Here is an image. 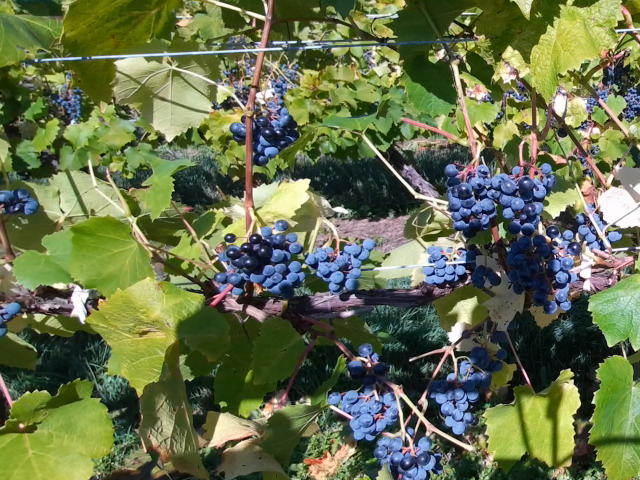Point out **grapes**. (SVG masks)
<instances>
[{
	"label": "grapes",
	"instance_id": "1",
	"mask_svg": "<svg viewBox=\"0 0 640 480\" xmlns=\"http://www.w3.org/2000/svg\"><path fill=\"white\" fill-rule=\"evenodd\" d=\"M543 174L542 183L538 179L521 175L514 180L506 173L495 175L492 179L489 175V165L477 166L476 174L468 173L467 182H461L456 175L458 167L447 164L444 173L447 175L445 186L448 188V212L454 220L453 229L462 231L465 238H473L476 232L486 231L489 222L497 215L494 200L504 206L503 217L512 220L507 232L512 236L519 234L509 247L506 254V264L511 269L509 278L512 281L511 290L514 294H521L526 286H533L534 303L543 306L546 315H554L559 311H569L572 302L569 300L568 291L570 283L578 280L575 272H568L575 267V262L570 257H558L547 264L550 272L557 273L555 281L558 289L555 291V300L548 301L550 284L541 275L540 265L536 261L528 259L524 252L536 247L535 257L539 260H547L558 254L557 249H552L547 243V237L556 239L555 247H562L565 255L578 256L581 253V244L573 238L571 230H565L559 234L557 226H549L544 234H536L533 237L536 225L541 221L540 215L545 209L542 200L546 197V188H554L558 179L551 175L552 166L548 163L540 165Z\"/></svg>",
	"mask_w": 640,
	"mask_h": 480
},
{
	"label": "grapes",
	"instance_id": "2",
	"mask_svg": "<svg viewBox=\"0 0 640 480\" xmlns=\"http://www.w3.org/2000/svg\"><path fill=\"white\" fill-rule=\"evenodd\" d=\"M270 226L261 228V235L252 233L249 242L240 245H229L224 252L218 254V260L227 265V272H216V283H227L233 296L244 293L245 281H252L265 288L271 295H282L291 298L294 287L306 280V272L301 270L299 260H291L292 255H300L304 247L298 242L296 233L272 235Z\"/></svg>",
	"mask_w": 640,
	"mask_h": 480
},
{
	"label": "grapes",
	"instance_id": "3",
	"mask_svg": "<svg viewBox=\"0 0 640 480\" xmlns=\"http://www.w3.org/2000/svg\"><path fill=\"white\" fill-rule=\"evenodd\" d=\"M364 391L357 393L349 390L344 395L340 392H332L327 396V401L332 405H339L346 413H351L352 419L348 421L352 430V438L355 442L363 438L371 442L382 434L386 426H391L398 419L396 399L394 391H385L383 395H372L368 401L359 399L366 397L373 390L376 377L371 374L363 378Z\"/></svg>",
	"mask_w": 640,
	"mask_h": 480
},
{
	"label": "grapes",
	"instance_id": "4",
	"mask_svg": "<svg viewBox=\"0 0 640 480\" xmlns=\"http://www.w3.org/2000/svg\"><path fill=\"white\" fill-rule=\"evenodd\" d=\"M469 360L461 361L458 366V373L464 376L460 381V387L453 386L457 375L449 373L445 380H435L428 391L429 397L437 404H441L440 411L445 415V425L450 427L455 435H461L466 426H475L478 419L472 416L469 403L474 404L480 398L479 390L487 389L492 383V373L490 371L474 372Z\"/></svg>",
	"mask_w": 640,
	"mask_h": 480
},
{
	"label": "grapes",
	"instance_id": "5",
	"mask_svg": "<svg viewBox=\"0 0 640 480\" xmlns=\"http://www.w3.org/2000/svg\"><path fill=\"white\" fill-rule=\"evenodd\" d=\"M374 247L375 241L372 238H366L362 244L347 243L342 247L339 257L332 261L329 259L335 254L332 247H317L315 252L305 255V263H317L315 276L329 283L328 289L332 294L340 295L344 286L348 292H353L361 276L360 266L370 257V251Z\"/></svg>",
	"mask_w": 640,
	"mask_h": 480
},
{
	"label": "grapes",
	"instance_id": "6",
	"mask_svg": "<svg viewBox=\"0 0 640 480\" xmlns=\"http://www.w3.org/2000/svg\"><path fill=\"white\" fill-rule=\"evenodd\" d=\"M433 445V440L428 436H422L413 444L415 456L411 452L403 454L404 440L401 437H381L373 448L372 455L379 459L381 464L389 463L397 467L402 476L401 480H426L427 472L440 475L444 466L439 463L444 459L441 453L428 451Z\"/></svg>",
	"mask_w": 640,
	"mask_h": 480
},
{
	"label": "grapes",
	"instance_id": "7",
	"mask_svg": "<svg viewBox=\"0 0 640 480\" xmlns=\"http://www.w3.org/2000/svg\"><path fill=\"white\" fill-rule=\"evenodd\" d=\"M277 114L280 115L277 120L264 116L253 118L251 139L252 151L256 154L253 163L257 167L265 166L270 158H275L298 139L296 122L287 109L279 108Z\"/></svg>",
	"mask_w": 640,
	"mask_h": 480
},
{
	"label": "grapes",
	"instance_id": "8",
	"mask_svg": "<svg viewBox=\"0 0 640 480\" xmlns=\"http://www.w3.org/2000/svg\"><path fill=\"white\" fill-rule=\"evenodd\" d=\"M443 252L444 248L442 246L429 245L427 247L429 257L426 262L435 264L434 268L421 269V272L426 275L424 282L428 285H442L445 281L451 284L465 283L467 281V271H470V278L475 288H481L484 285L483 276L489 280L491 286H499L501 284V278L486 264L478 266L475 262H467L465 267L463 265L447 266L445 261L448 260V257Z\"/></svg>",
	"mask_w": 640,
	"mask_h": 480
},
{
	"label": "grapes",
	"instance_id": "9",
	"mask_svg": "<svg viewBox=\"0 0 640 480\" xmlns=\"http://www.w3.org/2000/svg\"><path fill=\"white\" fill-rule=\"evenodd\" d=\"M0 206L5 214L35 215L39 212V204L32 199V193L27 188H14L0 192Z\"/></svg>",
	"mask_w": 640,
	"mask_h": 480
},
{
	"label": "grapes",
	"instance_id": "10",
	"mask_svg": "<svg viewBox=\"0 0 640 480\" xmlns=\"http://www.w3.org/2000/svg\"><path fill=\"white\" fill-rule=\"evenodd\" d=\"M583 210L585 211V213H578L576 215V222L581 224L577 228V234L580 236H584V241L589 243L588 249L590 251L593 249L600 250L602 248V242L601 240H598L596 238L597 231L593 226L588 227L586 225L587 212L584 205Z\"/></svg>",
	"mask_w": 640,
	"mask_h": 480
},
{
	"label": "grapes",
	"instance_id": "11",
	"mask_svg": "<svg viewBox=\"0 0 640 480\" xmlns=\"http://www.w3.org/2000/svg\"><path fill=\"white\" fill-rule=\"evenodd\" d=\"M21 309L20 303H6L3 313L0 315V336H4L7 332V320L16 316Z\"/></svg>",
	"mask_w": 640,
	"mask_h": 480
},
{
	"label": "grapes",
	"instance_id": "12",
	"mask_svg": "<svg viewBox=\"0 0 640 480\" xmlns=\"http://www.w3.org/2000/svg\"><path fill=\"white\" fill-rule=\"evenodd\" d=\"M346 368L349 370V376L354 380H359L365 374V362L362 360H351L346 364Z\"/></svg>",
	"mask_w": 640,
	"mask_h": 480
},
{
	"label": "grapes",
	"instance_id": "13",
	"mask_svg": "<svg viewBox=\"0 0 640 480\" xmlns=\"http://www.w3.org/2000/svg\"><path fill=\"white\" fill-rule=\"evenodd\" d=\"M245 124L241 123V122H234L230 125L229 130L231 131V134L233 135V140L243 144L244 143V131H245Z\"/></svg>",
	"mask_w": 640,
	"mask_h": 480
},
{
	"label": "grapes",
	"instance_id": "14",
	"mask_svg": "<svg viewBox=\"0 0 640 480\" xmlns=\"http://www.w3.org/2000/svg\"><path fill=\"white\" fill-rule=\"evenodd\" d=\"M358 353L361 357L371 355V362L375 363L379 360V353L373 352V345L370 342L363 343L358 347Z\"/></svg>",
	"mask_w": 640,
	"mask_h": 480
},
{
	"label": "grapes",
	"instance_id": "15",
	"mask_svg": "<svg viewBox=\"0 0 640 480\" xmlns=\"http://www.w3.org/2000/svg\"><path fill=\"white\" fill-rule=\"evenodd\" d=\"M457 251H461V258L455 259V261H458V260L473 261L476 257V252L474 250L466 251V249H457Z\"/></svg>",
	"mask_w": 640,
	"mask_h": 480
},
{
	"label": "grapes",
	"instance_id": "16",
	"mask_svg": "<svg viewBox=\"0 0 640 480\" xmlns=\"http://www.w3.org/2000/svg\"><path fill=\"white\" fill-rule=\"evenodd\" d=\"M373 369L383 376L386 375L388 371V367L386 363H379L375 365Z\"/></svg>",
	"mask_w": 640,
	"mask_h": 480
}]
</instances>
